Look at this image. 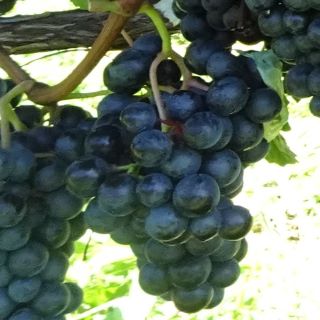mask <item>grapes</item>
<instances>
[{
	"mask_svg": "<svg viewBox=\"0 0 320 320\" xmlns=\"http://www.w3.org/2000/svg\"><path fill=\"white\" fill-rule=\"evenodd\" d=\"M17 85L15 80L0 78V99Z\"/></svg>",
	"mask_w": 320,
	"mask_h": 320,
	"instance_id": "obj_2",
	"label": "grapes"
},
{
	"mask_svg": "<svg viewBox=\"0 0 320 320\" xmlns=\"http://www.w3.org/2000/svg\"><path fill=\"white\" fill-rule=\"evenodd\" d=\"M21 97H22V92L10 100L9 104L12 107V109L17 106Z\"/></svg>",
	"mask_w": 320,
	"mask_h": 320,
	"instance_id": "obj_3",
	"label": "grapes"
},
{
	"mask_svg": "<svg viewBox=\"0 0 320 320\" xmlns=\"http://www.w3.org/2000/svg\"><path fill=\"white\" fill-rule=\"evenodd\" d=\"M182 34L192 42L184 62L209 75L208 90L184 82L181 66L156 68L167 120L154 99L135 94L163 49L157 30L105 68L98 117L59 106L57 124L41 126L42 111L14 109L27 129L10 122L11 148L1 150L0 320H65L83 290L63 283L72 242L91 228L131 244L140 285L175 301L183 313L218 306L240 274L252 225L230 198L243 188L246 162L269 150L264 123L282 108L252 58L231 54L236 40L265 41L280 60L287 88L310 97L320 117V0H174Z\"/></svg>",
	"mask_w": 320,
	"mask_h": 320,
	"instance_id": "obj_1",
	"label": "grapes"
}]
</instances>
